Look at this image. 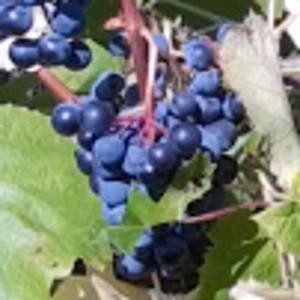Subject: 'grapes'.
Segmentation results:
<instances>
[{"mask_svg": "<svg viewBox=\"0 0 300 300\" xmlns=\"http://www.w3.org/2000/svg\"><path fill=\"white\" fill-rule=\"evenodd\" d=\"M91 0H0V40L18 36L7 49L19 69L40 62L83 73L93 64L91 45L80 34Z\"/></svg>", "mask_w": 300, "mask_h": 300, "instance_id": "obj_2", "label": "grapes"}, {"mask_svg": "<svg viewBox=\"0 0 300 300\" xmlns=\"http://www.w3.org/2000/svg\"><path fill=\"white\" fill-rule=\"evenodd\" d=\"M182 60L191 77L175 91L163 68L157 69L153 113L137 106V84L107 70L92 89L93 98L79 106L57 103L48 115V128L61 140H75L76 169L99 197L112 226L127 218L131 196L144 190L152 204L164 202L175 182L177 168L203 153L214 165L210 188L191 201L181 223H159L138 237L132 250L113 256L112 270L123 282L151 289L159 282L165 296L192 293L199 286L203 254L215 212L227 204L224 185L238 176L236 161L228 156L238 144L234 125L247 117L245 103L221 88L222 72L211 47L189 43Z\"/></svg>", "mask_w": 300, "mask_h": 300, "instance_id": "obj_1", "label": "grapes"}, {"mask_svg": "<svg viewBox=\"0 0 300 300\" xmlns=\"http://www.w3.org/2000/svg\"><path fill=\"white\" fill-rule=\"evenodd\" d=\"M108 53L117 60H127L131 57L129 38L124 33H119L111 38L107 44Z\"/></svg>", "mask_w": 300, "mask_h": 300, "instance_id": "obj_3", "label": "grapes"}]
</instances>
